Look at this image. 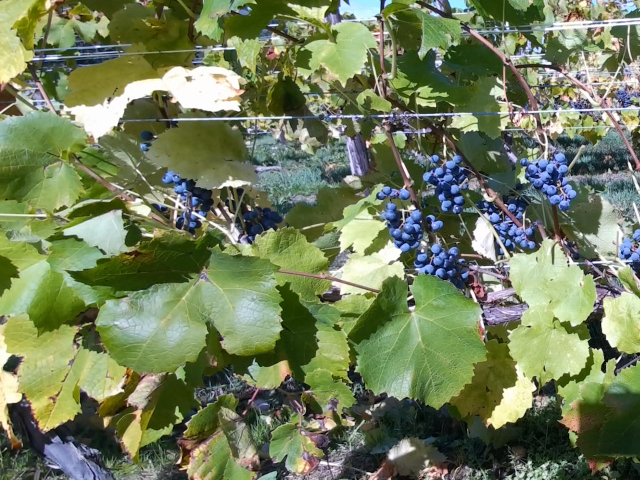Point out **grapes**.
Instances as JSON below:
<instances>
[{
    "instance_id": "2",
    "label": "grapes",
    "mask_w": 640,
    "mask_h": 480,
    "mask_svg": "<svg viewBox=\"0 0 640 480\" xmlns=\"http://www.w3.org/2000/svg\"><path fill=\"white\" fill-rule=\"evenodd\" d=\"M463 161L461 155H454L451 160L444 163V167L437 166L430 168L422 177L426 184H433L434 195L436 201L441 204V210L444 213L452 212L453 214H461L463 205L465 204V196L461 191H465L469 187V183L465 182L459 188L458 182L466 179L467 174L464 167H457Z\"/></svg>"
},
{
    "instance_id": "10",
    "label": "grapes",
    "mask_w": 640,
    "mask_h": 480,
    "mask_svg": "<svg viewBox=\"0 0 640 480\" xmlns=\"http://www.w3.org/2000/svg\"><path fill=\"white\" fill-rule=\"evenodd\" d=\"M619 247V258H640V247H637L635 252L631 250L633 248L632 240L629 238H623Z\"/></svg>"
},
{
    "instance_id": "1",
    "label": "grapes",
    "mask_w": 640,
    "mask_h": 480,
    "mask_svg": "<svg viewBox=\"0 0 640 480\" xmlns=\"http://www.w3.org/2000/svg\"><path fill=\"white\" fill-rule=\"evenodd\" d=\"M521 166L525 169V178L532 183L534 188L548 196V205L557 206L561 212H567L571 208V200H576L578 191L573 190V186L568 184V160L565 155L559 152L552 154V159H533L530 163L528 158L520 160ZM555 181L561 182L562 193L558 194Z\"/></svg>"
},
{
    "instance_id": "4",
    "label": "grapes",
    "mask_w": 640,
    "mask_h": 480,
    "mask_svg": "<svg viewBox=\"0 0 640 480\" xmlns=\"http://www.w3.org/2000/svg\"><path fill=\"white\" fill-rule=\"evenodd\" d=\"M476 207L479 212L489 215V222L494 225V229L498 232L500 242L509 251L517 249L516 243H520L522 249H536V242L528 240V238H532L535 235L536 229L543 224L542 220L534 221L532 226L521 231L505 212L500 214L497 206L492 202L477 201Z\"/></svg>"
},
{
    "instance_id": "6",
    "label": "grapes",
    "mask_w": 640,
    "mask_h": 480,
    "mask_svg": "<svg viewBox=\"0 0 640 480\" xmlns=\"http://www.w3.org/2000/svg\"><path fill=\"white\" fill-rule=\"evenodd\" d=\"M161 182L164 184L175 183L174 192L181 195L179 197L180 201H186V195L189 192H192V194L189 195V198L191 199V206H200V209H197L196 213L203 218L207 217V212L210 211V207L214 204V200L212 199V189H200L199 187H195L196 182L193 179L180 180V174L175 171H166L165 175L161 177Z\"/></svg>"
},
{
    "instance_id": "3",
    "label": "grapes",
    "mask_w": 640,
    "mask_h": 480,
    "mask_svg": "<svg viewBox=\"0 0 640 480\" xmlns=\"http://www.w3.org/2000/svg\"><path fill=\"white\" fill-rule=\"evenodd\" d=\"M431 253L435 257L430 263L429 254L427 252L422 253L417 251L415 256L417 259L412 261V265L418 268L420 274L425 275H437L441 279L447 280L450 277V281L457 289H462L464 283L469 281V273L466 270H462V266L466 264L464 258H458L460 256V249L457 246H451L448 251L444 250L441 244H432L430 246Z\"/></svg>"
},
{
    "instance_id": "11",
    "label": "grapes",
    "mask_w": 640,
    "mask_h": 480,
    "mask_svg": "<svg viewBox=\"0 0 640 480\" xmlns=\"http://www.w3.org/2000/svg\"><path fill=\"white\" fill-rule=\"evenodd\" d=\"M426 221L429 223V227L433 232L440 231L444 228V222L442 220L436 221V216L434 214H429L426 217Z\"/></svg>"
},
{
    "instance_id": "8",
    "label": "grapes",
    "mask_w": 640,
    "mask_h": 480,
    "mask_svg": "<svg viewBox=\"0 0 640 480\" xmlns=\"http://www.w3.org/2000/svg\"><path fill=\"white\" fill-rule=\"evenodd\" d=\"M389 196L390 198H399L400 200H409L411 198L410 192L406 187L391 188L390 186H385L382 191H379L376 194V197L379 200H385Z\"/></svg>"
},
{
    "instance_id": "12",
    "label": "grapes",
    "mask_w": 640,
    "mask_h": 480,
    "mask_svg": "<svg viewBox=\"0 0 640 480\" xmlns=\"http://www.w3.org/2000/svg\"><path fill=\"white\" fill-rule=\"evenodd\" d=\"M201 227V221L199 220L198 216H195L193 214L189 215V222L187 225V228L189 229V232L191 234H195L196 230L195 229H199Z\"/></svg>"
},
{
    "instance_id": "9",
    "label": "grapes",
    "mask_w": 640,
    "mask_h": 480,
    "mask_svg": "<svg viewBox=\"0 0 640 480\" xmlns=\"http://www.w3.org/2000/svg\"><path fill=\"white\" fill-rule=\"evenodd\" d=\"M508 197L509 195L508 196L503 195L504 204L508 205V208L518 220H522L523 219L522 212L525 210L526 206H529V204L522 197H521V200H519L520 196L518 197L517 200L510 199Z\"/></svg>"
},
{
    "instance_id": "13",
    "label": "grapes",
    "mask_w": 640,
    "mask_h": 480,
    "mask_svg": "<svg viewBox=\"0 0 640 480\" xmlns=\"http://www.w3.org/2000/svg\"><path fill=\"white\" fill-rule=\"evenodd\" d=\"M523 188H524V185H523V184H521L520 182H518V183L516 184V189H515V188H512V189H510L508 192H514V191H517V190H518V191H522V190H523Z\"/></svg>"
},
{
    "instance_id": "5",
    "label": "grapes",
    "mask_w": 640,
    "mask_h": 480,
    "mask_svg": "<svg viewBox=\"0 0 640 480\" xmlns=\"http://www.w3.org/2000/svg\"><path fill=\"white\" fill-rule=\"evenodd\" d=\"M385 209L387 211H383L381 216L388 221L386 227L388 228L389 235L392 237L393 245L402 253L417 249L420 245L418 240L423 237V233L421 232L423 230L421 224L423 212L419 208L413 210L410 216L405 218L402 229H399L402 224V213L397 211V205L393 202H388Z\"/></svg>"
},
{
    "instance_id": "7",
    "label": "grapes",
    "mask_w": 640,
    "mask_h": 480,
    "mask_svg": "<svg viewBox=\"0 0 640 480\" xmlns=\"http://www.w3.org/2000/svg\"><path fill=\"white\" fill-rule=\"evenodd\" d=\"M259 214H263V217L259 218L260 224H251L250 222L246 223L245 233L247 235V243L252 244L255 240L256 235H260L265 231L273 228L274 230L278 229L277 224L283 222V217L278 214L277 211H271L269 207L261 208L260 205L256 206V211H247L242 214V218L244 220L256 219Z\"/></svg>"
}]
</instances>
